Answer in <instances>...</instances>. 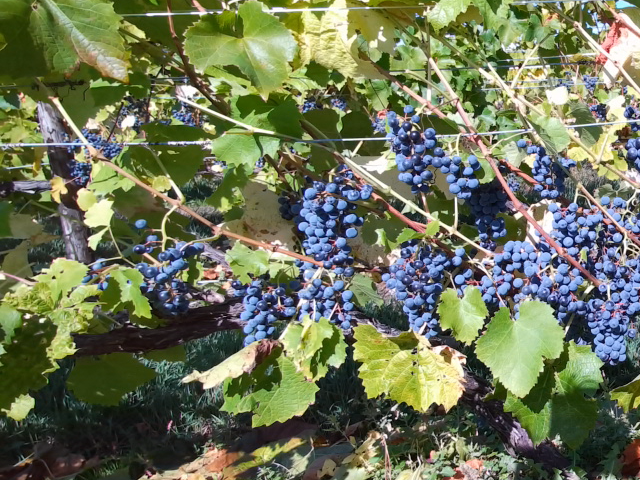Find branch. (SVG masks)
<instances>
[{"mask_svg":"<svg viewBox=\"0 0 640 480\" xmlns=\"http://www.w3.org/2000/svg\"><path fill=\"white\" fill-rule=\"evenodd\" d=\"M359 56L361 59L371 63V65L374 67V70L381 76H383L384 78L389 79L391 82H393L398 89H400L401 91H403L404 93H406L408 96H410L411 98H413L414 100L418 101L419 103H421L424 107H426L427 109L430 110V112L440 118H444L445 114L440 112L439 110H436L429 102H427L425 99L421 98L419 95L415 94L414 92H412L411 90H409L407 87L403 86L401 84V82L399 80H397L393 75L385 72L384 70H382L378 63L376 62V60L370 56H367L364 52H360Z\"/></svg>","mask_w":640,"mask_h":480,"instance_id":"obj_8","label":"branch"},{"mask_svg":"<svg viewBox=\"0 0 640 480\" xmlns=\"http://www.w3.org/2000/svg\"><path fill=\"white\" fill-rule=\"evenodd\" d=\"M382 14L385 16V18L388 21H390L396 27L401 29L403 32L407 33L412 38L413 42L420 48V50L422 51V54H423L424 58L426 59L429 67L437 74L438 79L440 80V82L448 90V92L450 94V97L452 99H454L455 102L457 103L458 109H459V113L461 114V118L466 123V125L468 127V132H474L473 125L471 123V120L469 119V116H468V114L466 112V109H465L460 97L455 95V91L453 90V87L449 84L448 81L445 80V78L443 77L442 71L440 70V68L438 67V65L435 62V59L431 58L429 56L428 51L425 48V46L423 45V43L417 38V36L415 35V33L412 30H410L409 28H407L406 26L401 24L398 20L394 19L387 11H382Z\"/></svg>","mask_w":640,"mask_h":480,"instance_id":"obj_5","label":"branch"},{"mask_svg":"<svg viewBox=\"0 0 640 480\" xmlns=\"http://www.w3.org/2000/svg\"><path fill=\"white\" fill-rule=\"evenodd\" d=\"M497 162H498L499 164L504 165L505 167H507V168L511 169V170H512V172H513L516 176H518L519 178L524 179V180H525V183H526L527 185H529V186H533V185H535V184H536V180H535V179H533V178L529 177L528 175H526L525 173H522L521 171H519V170L517 169V167H516V166H514L512 163H509L508 161L503 160L502 158H498V159H497Z\"/></svg>","mask_w":640,"mask_h":480,"instance_id":"obj_14","label":"branch"},{"mask_svg":"<svg viewBox=\"0 0 640 480\" xmlns=\"http://www.w3.org/2000/svg\"><path fill=\"white\" fill-rule=\"evenodd\" d=\"M440 226L445 228L447 231H449L450 233H452L453 235L457 236L460 240H462L463 242L467 243V244H471L475 249H477L479 252L484 253L485 255H488L490 257H494L495 253L493 251H490L486 248L481 247L475 240L470 239L468 237H466L465 235H463L462 233H460L458 230H456L455 228L449 226L446 222H441Z\"/></svg>","mask_w":640,"mask_h":480,"instance_id":"obj_13","label":"branch"},{"mask_svg":"<svg viewBox=\"0 0 640 480\" xmlns=\"http://www.w3.org/2000/svg\"><path fill=\"white\" fill-rule=\"evenodd\" d=\"M431 242H434L435 245L440 249L443 250L444 252L448 253L450 256L454 255V251L451 248H448L447 246L443 245L436 237H431L430 238Z\"/></svg>","mask_w":640,"mask_h":480,"instance_id":"obj_16","label":"branch"},{"mask_svg":"<svg viewBox=\"0 0 640 480\" xmlns=\"http://www.w3.org/2000/svg\"><path fill=\"white\" fill-rule=\"evenodd\" d=\"M310 145L315 147V148L320 149L323 152L330 153V154L334 155V159L337 160L339 163L347 164L348 165V170L352 171L355 174L354 179H355V181L357 183L364 184L365 180L358 176V173L356 172L354 167H356L359 171L363 172L364 176L367 177L372 182H374L377 186L382 188L384 191L388 192L391 196H393V197L397 198L398 200H401L402 202L407 204L409 207H411L412 209L417 211L421 216H423L425 218H429L433 222L437 221V217L436 216H434L431 213L425 212L421 207L417 206L410 199H408L407 197L397 193L391 187H388L386 184H384L378 178H376L370 172H368L366 170V168L363 167L359 162H357L356 160L352 159L351 157L343 155L342 153L334 150L333 148H328L326 146H323L320 143L319 144H310Z\"/></svg>","mask_w":640,"mask_h":480,"instance_id":"obj_4","label":"branch"},{"mask_svg":"<svg viewBox=\"0 0 640 480\" xmlns=\"http://www.w3.org/2000/svg\"><path fill=\"white\" fill-rule=\"evenodd\" d=\"M89 151L98 159H100L103 163H105L110 169H112L113 171L117 172L118 174H120L121 176L127 178L128 180L139 184L141 187H143L148 193L158 197L159 199L169 202L175 206H177L178 208L182 209L183 211H185L187 214H189L190 216L200 220L201 222H203L208 228H210L213 232H216L217 234H220L222 236H227L230 238H234V239H241L245 242H247L248 244L255 246V247H259L261 249H265V250H269V251H273L276 253H281L283 255H286L290 258H294V259H300L303 260L305 262H309L312 263L318 267L324 268L325 267V263L324 262H320L315 258H311L308 257L306 255L303 254H296V253H292L286 249L283 248H278V247H274L271 245H267V244H263L261 242L255 241L250 239L249 237L245 236L244 234H236L230 231H224L216 226H214L209 220H207L204 216L200 215L199 213L192 211L190 208H188L186 205H184L183 203L163 195L161 192H158L154 189H152L151 187H149L143 180L136 178L134 176H132L130 173H127L125 171H123L121 168H119L118 166L114 165L112 162H110L103 154H100L96 149H94V147H88Z\"/></svg>","mask_w":640,"mask_h":480,"instance_id":"obj_1","label":"branch"},{"mask_svg":"<svg viewBox=\"0 0 640 480\" xmlns=\"http://www.w3.org/2000/svg\"><path fill=\"white\" fill-rule=\"evenodd\" d=\"M371 197L379 201L383 206H385L390 212H392L398 219L402 220L405 224L410 227L416 229L420 234L424 233V230H428L429 226L421 223L413 222L407 219L404 215H402L399 211H397L393 206L390 205L383 197L379 196L376 193H372Z\"/></svg>","mask_w":640,"mask_h":480,"instance_id":"obj_12","label":"branch"},{"mask_svg":"<svg viewBox=\"0 0 640 480\" xmlns=\"http://www.w3.org/2000/svg\"><path fill=\"white\" fill-rule=\"evenodd\" d=\"M555 164L557 166H560L561 169L564 170L565 173L568 174V176L572 179V181L577 185V187L582 190V193L589 198L594 204L598 205L600 207V210L602 211V213L607 217L608 220L611 221V223L615 226V228L621 232L625 237H627L633 244H635L637 247H640V241H638L637 239H635L627 230H625L620 224L619 222L611 215V213L607 210V208L605 207L604 203L601 202L600 200H598L594 195H592L586 187H584V185L582 184V182L577 178V176L566 166H564L561 162L559 158L555 159Z\"/></svg>","mask_w":640,"mask_h":480,"instance_id":"obj_7","label":"branch"},{"mask_svg":"<svg viewBox=\"0 0 640 480\" xmlns=\"http://www.w3.org/2000/svg\"><path fill=\"white\" fill-rule=\"evenodd\" d=\"M549 8L555 13L558 14L560 17H563L567 20H569L577 29H578V33L581 35V37L584 40H587L589 43L593 44L594 47L602 54V56L617 70H619L624 77L627 79V81L631 84V87L634 88L638 94H640V87L636 84V82L632 79V77L629 75V73L626 71L625 68H623L620 64H618L617 62L614 61V59L606 52V50L595 40L593 39L591 36L587 35L586 32L583 30V27L581 26V24L571 15L567 14L566 12H562L560 9L556 8L553 4L549 5Z\"/></svg>","mask_w":640,"mask_h":480,"instance_id":"obj_6","label":"branch"},{"mask_svg":"<svg viewBox=\"0 0 640 480\" xmlns=\"http://www.w3.org/2000/svg\"><path fill=\"white\" fill-rule=\"evenodd\" d=\"M32 82H35L40 89L46 93L47 97L56 104L58 111L60 112V115L67 121L69 122V124L74 128V130L76 131V133L78 134L79 139L83 142L86 143L88 142V139L86 138L85 135H83L82 130L80 129V127L75 123V121L65 112L61 101L58 98H55L53 96V94L51 93V91L42 83V81L37 78V77H32L31 78Z\"/></svg>","mask_w":640,"mask_h":480,"instance_id":"obj_11","label":"branch"},{"mask_svg":"<svg viewBox=\"0 0 640 480\" xmlns=\"http://www.w3.org/2000/svg\"><path fill=\"white\" fill-rule=\"evenodd\" d=\"M168 23H169V28H170V33H171V37L174 41V43L176 44L178 51L181 55V59H182V64L184 66V70L186 72V74L188 75L189 79L192 82L193 87L198 91L199 94H201L205 99H207L210 103H212L220 112L215 111L209 107H207L206 105H204L203 103H199L198 101H193L191 99H187L184 98L180 95H176L175 99L191 105V106H196L197 108H200L201 110H204L205 112H207L208 114H211L212 116H216L220 119L226 120L227 122L237 126V127H242L245 128L249 131H252L254 133H258V134H263V135H268L271 137H284V138H303L302 135H295V134H290V133H286V132H273L270 130H265V129H260V128H256L254 126H251L247 123L244 122H239L233 118L230 117V114L224 109L223 106H221V104L214 99L212 96H210L207 92H205L201 86L198 84L196 78L194 77L193 73L190 70L188 61H187V57H186V53L183 49L182 43L180 42L178 36L176 35V30H175V25H174V20L173 17H168Z\"/></svg>","mask_w":640,"mask_h":480,"instance_id":"obj_2","label":"branch"},{"mask_svg":"<svg viewBox=\"0 0 640 480\" xmlns=\"http://www.w3.org/2000/svg\"><path fill=\"white\" fill-rule=\"evenodd\" d=\"M466 139L472 142L474 145H478V147L481 149L483 153L484 158L486 159L488 166L493 170L496 180L501 186V188L503 189V191L505 192L506 196L513 202L517 211L520 212L525 218H527L529 222L533 224L534 228L540 234L542 239L545 240L551 247H553V249L556 250L559 256H564L566 259L570 260L575 265L576 269L580 271L581 274L584 275L591 283H593L594 286H599L600 282L597 281L591 274H589L585 270V268L580 265V262H576L572 257L569 256V254L565 250L559 247L556 242H554L550 237H548L547 234L543 231L542 227L539 225L538 221L535 218H533L530 213L526 212L525 208L519 204L517 198L513 196V194L510 192V189L506 186L505 182L503 181L500 175L499 169L492 162L491 157L489 156V153L486 149L488 147V144L483 143L480 137H466Z\"/></svg>","mask_w":640,"mask_h":480,"instance_id":"obj_3","label":"branch"},{"mask_svg":"<svg viewBox=\"0 0 640 480\" xmlns=\"http://www.w3.org/2000/svg\"><path fill=\"white\" fill-rule=\"evenodd\" d=\"M300 127L304 130V132L307 134L308 137L313 138V139H317L318 138V136L314 133V130L313 129H309L304 122L300 123Z\"/></svg>","mask_w":640,"mask_h":480,"instance_id":"obj_17","label":"branch"},{"mask_svg":"<svg viewBox=\"0 0 640 480\" xmlns=\"http://www.w3.org/2000/svg\"><path fill=\"white\" fill-rule=\"evenodd\" d=\"M431 37L434 38L435 40H437L438 42L442 43L444 46H446L447 48H449L456 56H458L460 59H462L468 66L472 67V69L474 71H477L478 73L484 75L489 81H491V83L496 86L497 88L500 89H505L506 85L502 84L498 81H496V78L494 76H492L489 72H487L486 70H484L483 68L477 66L474 62H472L469 58H467L464 54H462L453 44H451L449 41H447L446 39H444L443 37H440L439 35H437L435 32L431 33Z\"/></svg>","mask_w":640,"mask_h":480,"instance_id":"obj_9","label":"branch"},{"mask_svg":"<svg viewBox=\"0 0 640 480\" xmlns=\"http://www.w3.org/2000/svg\"><path fill=\"white\" fill-rule=\"evenodd\" d=\"M512 96H513L515 99H517V100H519V101L523 102L524 104H526V105H527V106H528V107H529L533 112L537 113V114H538V115H540L541 117H545V116H546V113H545V112H543V111H542L541 109H539L538 107L534 106V104H533V103H531V102H530L526 97H523V96L519 95V94H518V93H516V92H513V93H512Z\"/></svg>","mask_w":640,"mask_h":480,"instance_id":"obj_15","label":"branch"},{"mask_svg":"<svg viewBox=\"0 0 640 480\" xmlns=\"http://www.w3.org/2000/svg\"><path fill=\"white\" fill-rule=\"evenodd\" d=\"M567 135L569 136V138L572 140V142L576 145V147L581 150L582 152H584L586 155L590 156V158L595 161L599 166H601L603 169H605L607 172L611 173L612 175L616 176L617 178L623 180L624 182H627L629 184H631L632 186L636 187L637 189H640V184L638 182H636L634 179H631L627 176H625L624 174L619 173L617 170H614L612 167H609L606 163H604L599 157H597L591 150H588L585 146H583L579 140L577 139V137L572 133L571 130L567 131Z\"/></svg>","mask_w":640,"mask_h":480,"instance_id":"obj_10","label":"branch"}]
</instances>
